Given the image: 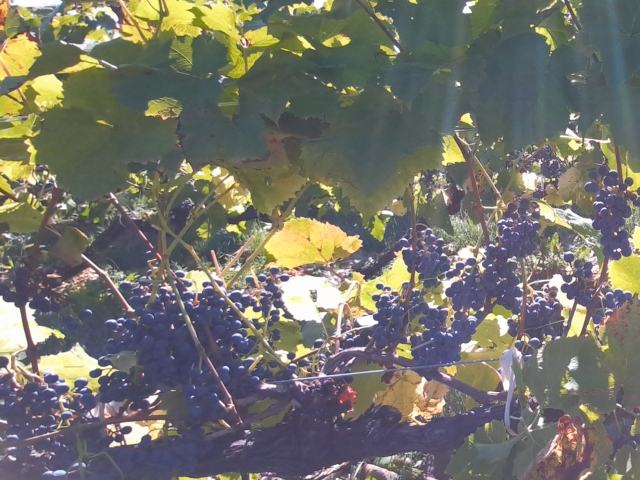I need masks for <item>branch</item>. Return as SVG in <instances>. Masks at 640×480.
Instances as JSON below:
<instances>
[{"mask_svg": "<svg viewBox=\"0 0 640 480\" xmlns=\"http://www.w3.org/2000/svg\"><path fill=\"white\" fill-rule=\"evenodd\" d=\"M19 316H20L22 329H23V332L26 338V343H27L28 362L30 364L31 370L34 373H37L39 371L37 361L35 359L37 350L34 348L33 336L30 330L26 309L24 307H21L19 309Z\"/></svg>", "mask_w": 640, "mask_h": 480, "instance_id": "branch-7", "label": "branch"}, {"mask_svg": "<svg viewBox=\"0 0 640 480\" xmlns=\"http://www.w3.org/2000/svg\"><path fill=\"white\" fill-rule=\"evenodd\" d=\"M80 259L84 264H86L90 269L95 271L102 278V280L104 281L105 285L108 287L111 294L122 305V307L125 309L127 314L129 316H133L135 314V311L132 309L128 301L119 293V291L117 290L115 285L112 283L111 279L109 278L108 274L100 266L92 262L86 254H82L80 256Z\"/></svg>", "mask_w": 640, "mask_h": 480, "instance_id": "branch-6", "label": "branch"}, {"mask_svg": "<svg viewBox=\"0 0 640 480\" xmlns=\"http://www.w3.org/2000/svg\"><path fill=\"white\" fill-rule=\"evenodd\" d=\"M167 416L165 414H143L137 413L136 415H124L119 417H108L102 419H96L89 422H85L79 425L70 426L69 428H62L56 430H50L40 434H35L26 440H23L17 444L19 449L26 448L31 444L49 439L52 437L65 436L72 433L82 432L87 429H91L98 426L121 424L126 422H138V421H165Z\"/></svg>", "mask_w": 640, "mask_h": 480, "instance_id": "branch-2", "label": "branch"}, {"mask_svg": "<svg viewBox=\"0 0 640 480\" xmlns=\"http://www.w3.org/2000/svg\"><path fill=\"white\" fill-rule=\"evenodd\" d=\"M520 268H521V274H522L523 291H522L521 322H520V327H519V333L516 336L517 340H521L522 339V336H523L524 330H525V324H526L528 282H527V271H526V265H525V258L524 257L520 258Z\"/></svg>", "mask_w": 640, "mask_h": 480, "instance_id": "branch-9", "label": "branch"}, {"mask_svg": "<svg viewBox=\"0 0 640 480\" xmlns=\"http://www.w3.org/2000/svg\"><path fill=\"white\" fill-rule=\"evenodd\" d=\"M577 310H578V305L574 304L572 309H571V311H570V313H569V315H568L567 321H566V326H565V329H564V332H563V336L564 337H567L569 335V331H570V328H571L573 317L576 314Z\"/></svg>", "mask_w": 640, "mask_h": 480, "instance_id": "branch-13", "label": "branch"}, {"mask_svg": "<svg viewBox=\"0 0 640 480\" xmlns=\"http://www.w3.org/2000/svg\"><path fill=\"white\" fill-rule=\"evenodd\" d=\"M406 190L408 191L410 206H411V214H412V251H417V237H418V224H417V211H416V203L414 199L413 188L411 186H407Z\"/></svg>", "mask_w": 640, "mask_h": 480, "instance_id": "branch-10", "label": "branch"}, {"mask_svg": "<svg viewBox=\"0 0 640 480\" xmlns=\"http://www.w3.org/2000/svg\"><path fill=\"white\" fill-rule=\"evenodd\" d=\"M59 197H60V191L58 189H54L50 193L47 209L44 212L42 218L40 219V223L37 229L32 252H31V255L29 256V265L32 269H35L37 267L36 258L38 257V254L40 251L45 228L56 237H59L61 235V231L59 229L54 227L52 224L47 225V222L49 221L54 211V208L59 201Z\"/></svg>", "mask_w": 640, "mask_h": 480, "instance_id": "branch-4", "label": "branch"}, {"mask_svg": "<svg viewBox=\"0 0 640 480\" xmlns=\"http://www.w3.org/2000/svg\"><path fill=\"white\" fill-rule=\"evenodd\" d=\"M607 266H608V258L604 257L603 258V264H602V267H601V270H600V275H599V278H598L597 287H596V290H595V294H594L593 300L591 301V304L589 305V308L587 310V313H586V316H585V319H584V322H583V325H582V329L580 331V335L581 336H584L586 331H587V328H588V325H589L590 318L592 316L593 310H594V308H595V306H596V304L598 302V299L600 297V292H601V289H602L603 280H604V277H605Z\"/></svg>", "mask_w": 640, "mask_h": 480, "instance_id": "branch-8", "label": "branch"}, {"mask_svg": "<svg viewBox=\"0 0 640 480\" xmlns=\"http://www.w3.org/2000/svg\"><path fill=\"white\" fill-rule=\"evenodd\" d=\"M614 151H615L616 160H617V169H618V173H619V182L623 183L624 182V170H623V166H622V158H621L620 148L619 147H615Z\"/></svg>", "mask_w": 640, "mask_h": 480, "instance_id": "branch-12", "label": "branch"}, {"mask_svg": "<svg viewBox=\"0 0 640 480\" xmlns=\"http://www.w3.org/2000/svg\"><path fill=\"white\" fill-rule=\"evenodd\" d=\"M311 188V184L307 183L306 186L297 192L290 202L289 206L279 215L277 218V222L275 227H271L266 237L262 240V242L251 252L246 262L240 267V269L236 272V274L231 278V280L226 284V289L230 290L231 286L235 284V282L239 279L242 273L249 267V265L253 262L255 256L263 249V247L270 241L275 231L280 229L283 219L292 211L297 200L302 195L306 194Z\"/></svg>", "mask_w": 640, "mask_h": 480, "instance_id": "branch-5", "label": "branch"}, {"mask_svg": "<svg viewBox=\"0 0 640 480\" xmlns=\"http://www.w3.org/2000/svg\"><path fill=\"white\" fill-rule=\"evenodd\" d=\"M416 283V263L412 262L411 263V280L408 284V288H407V295H406V300L404 303L405 307H409L410 306V302H411V297H412V290L414 287V284Z\"/></svg>", "mask_w": 640, "mask_h": 480, "instance_id": "branch-11", "label": "branch"}, {"mask_svg": "<svg viewBox=\"0 0 640 480\" xmlns=\"http://www.w3.org/2000/svg\"><path fill=\"white\" fill-rule=\"evenodd\" d=\"M0 194L3 195L7 200L15 202L16 204H19L21 202V199L19 197H17L15 194L10 193L3 187H0Z\"/></svg>", "mask_w": 640, "mask_h": 480, "instance_id": "branch-14", "label": "branch"}, {"mask_svg": "<svg viewBox=\"0 0 640 480\" xmlns=\"http://www.w3.org/2000/svg\"><path fill=\"white\" fill-rule=\"evenodd\" d=\"M453 138L455 140V143L457 144V146L459 147L462 157L466 162V167L468 170V174H469V178H470V183L472 186V190H473V194L475 197V202L477 204L478 210H479V215H480V221H481V230H482V234H483V240L486 246L490 245V241H489V237H488V231L486 228V219H485V213H484V208L480 199V194L477 188V183L475 180V176H474V171H473V167L471 165V160L469 158V156L471 158H473L474 162L476 163V165L478 166L479 170L481 171V173L483 174V177L487 183L488 188L490 189V191L492 192V194L497 198V201L500 205L501 208H505L506 204L503 201L502 196L499 194V192L497 191V189L494 187L491 178L487 172V170L485 169V167L483 166L482 162L480 161L478 156H475L474 152L472 151V149L467 145V143L465 142V140L463 138H460L458 134H454Z\"/></svg>", "mask_w": 640, "mask_h": 480, "instance_id": "branch-3", "label": "branch"}, {"mask_svg": "<svg viewBox=\"0 0 640 480\" xmlns=\"http://www.w3.org/2000/svg\"><path fill=\"white\" fill-rule=\"evenodd\" d=\"M233 188H234V184L233 183H230V184L226 185L215 196V198L209 204H207L206 206L201 208L182 227V229L178 232L177 235L168 227L167 224H164L163 225V230H159L157 232L156 248L148 240V237L141 230V228L134 222V220L132 219L130 214L126 211V209L122 206V204L116 199V197H115V195L113 193H110L108 195V199L113 204V206L117 209V211L121 214V216L125 219V221L130 226V228L141 239V242L144 244V246L149 251H152L153 255H157V259L159 261H161L159 266H158V269L156 271L154 284L151 287V296L152 297L156 296V290L159 287L161 274H162V271H163V269L165 267L166 277H167L168 283H169V285L171 287L173 299L176 302L179 310L181 311V314H182V316L184 318L185 324H186V326L188 328V331H189L190 338H191V340L193 342V345H194V347H195V349L197 351V354H198V356L200 358H203V361L205 362L208 370L212 374V377L214 378L219 391L221 392V394L223 395L224 399L227 402V405H228V407L230 409V412H231V415H232V418H233L234 422L236 424H239L241 422V418H240L239 412L237 410V407L235 405V402H234L233 398L231 397V394L229 393L228 389L224 385V382H223L221 376L219 375V372L215 368V366H214L209 354L206 351H204L203 346L201 345L200 340H199V338L197 336L196 329H195V326L193 324L192 318H191V316L189 314V311L186 308V305H185L184 301L182 300V298L180 296L178 284L175 281V278H174V275H173V270H172V265L170 264L171 260H170V257H169L170 254H171V251L173 250L174 246L177 243H179V244L183 245L184 247H186L188 249L190 255L198 263V265L200 266L202 271L208 276L212 289L218 295H220L222 298L225 299V301L227 302L228 306L232 309V311L237 316H239L249 326V328L252 330L254 335L256 337H258L259 340L265 346L268 347V350L271 352V355L275 359L279 358V354L276 352V350L273 347L272 343L270 341H267L265 339V337L262 335V333L259 332L258 329L255 327V325L250 321V319L236 307V305L233 303V301L229 297V295L226 294L224 291H222L217 286V284L215 283V279H214V276H213L212 272L207 268V266L204 264L203 260L194 251L193 246L189 242H187L186 240L181 239L183 237V235L185 234V232L190 228V226H192L204 213H206L208 210H210L212 207H214L218 203V201L224 196V194L226 192H228L229 190L233 189Z\"/></svg>", "mask_w": 640, "mask_h": 480, "instance_id": "branch-1", "label": "branch"}]
</instances>
